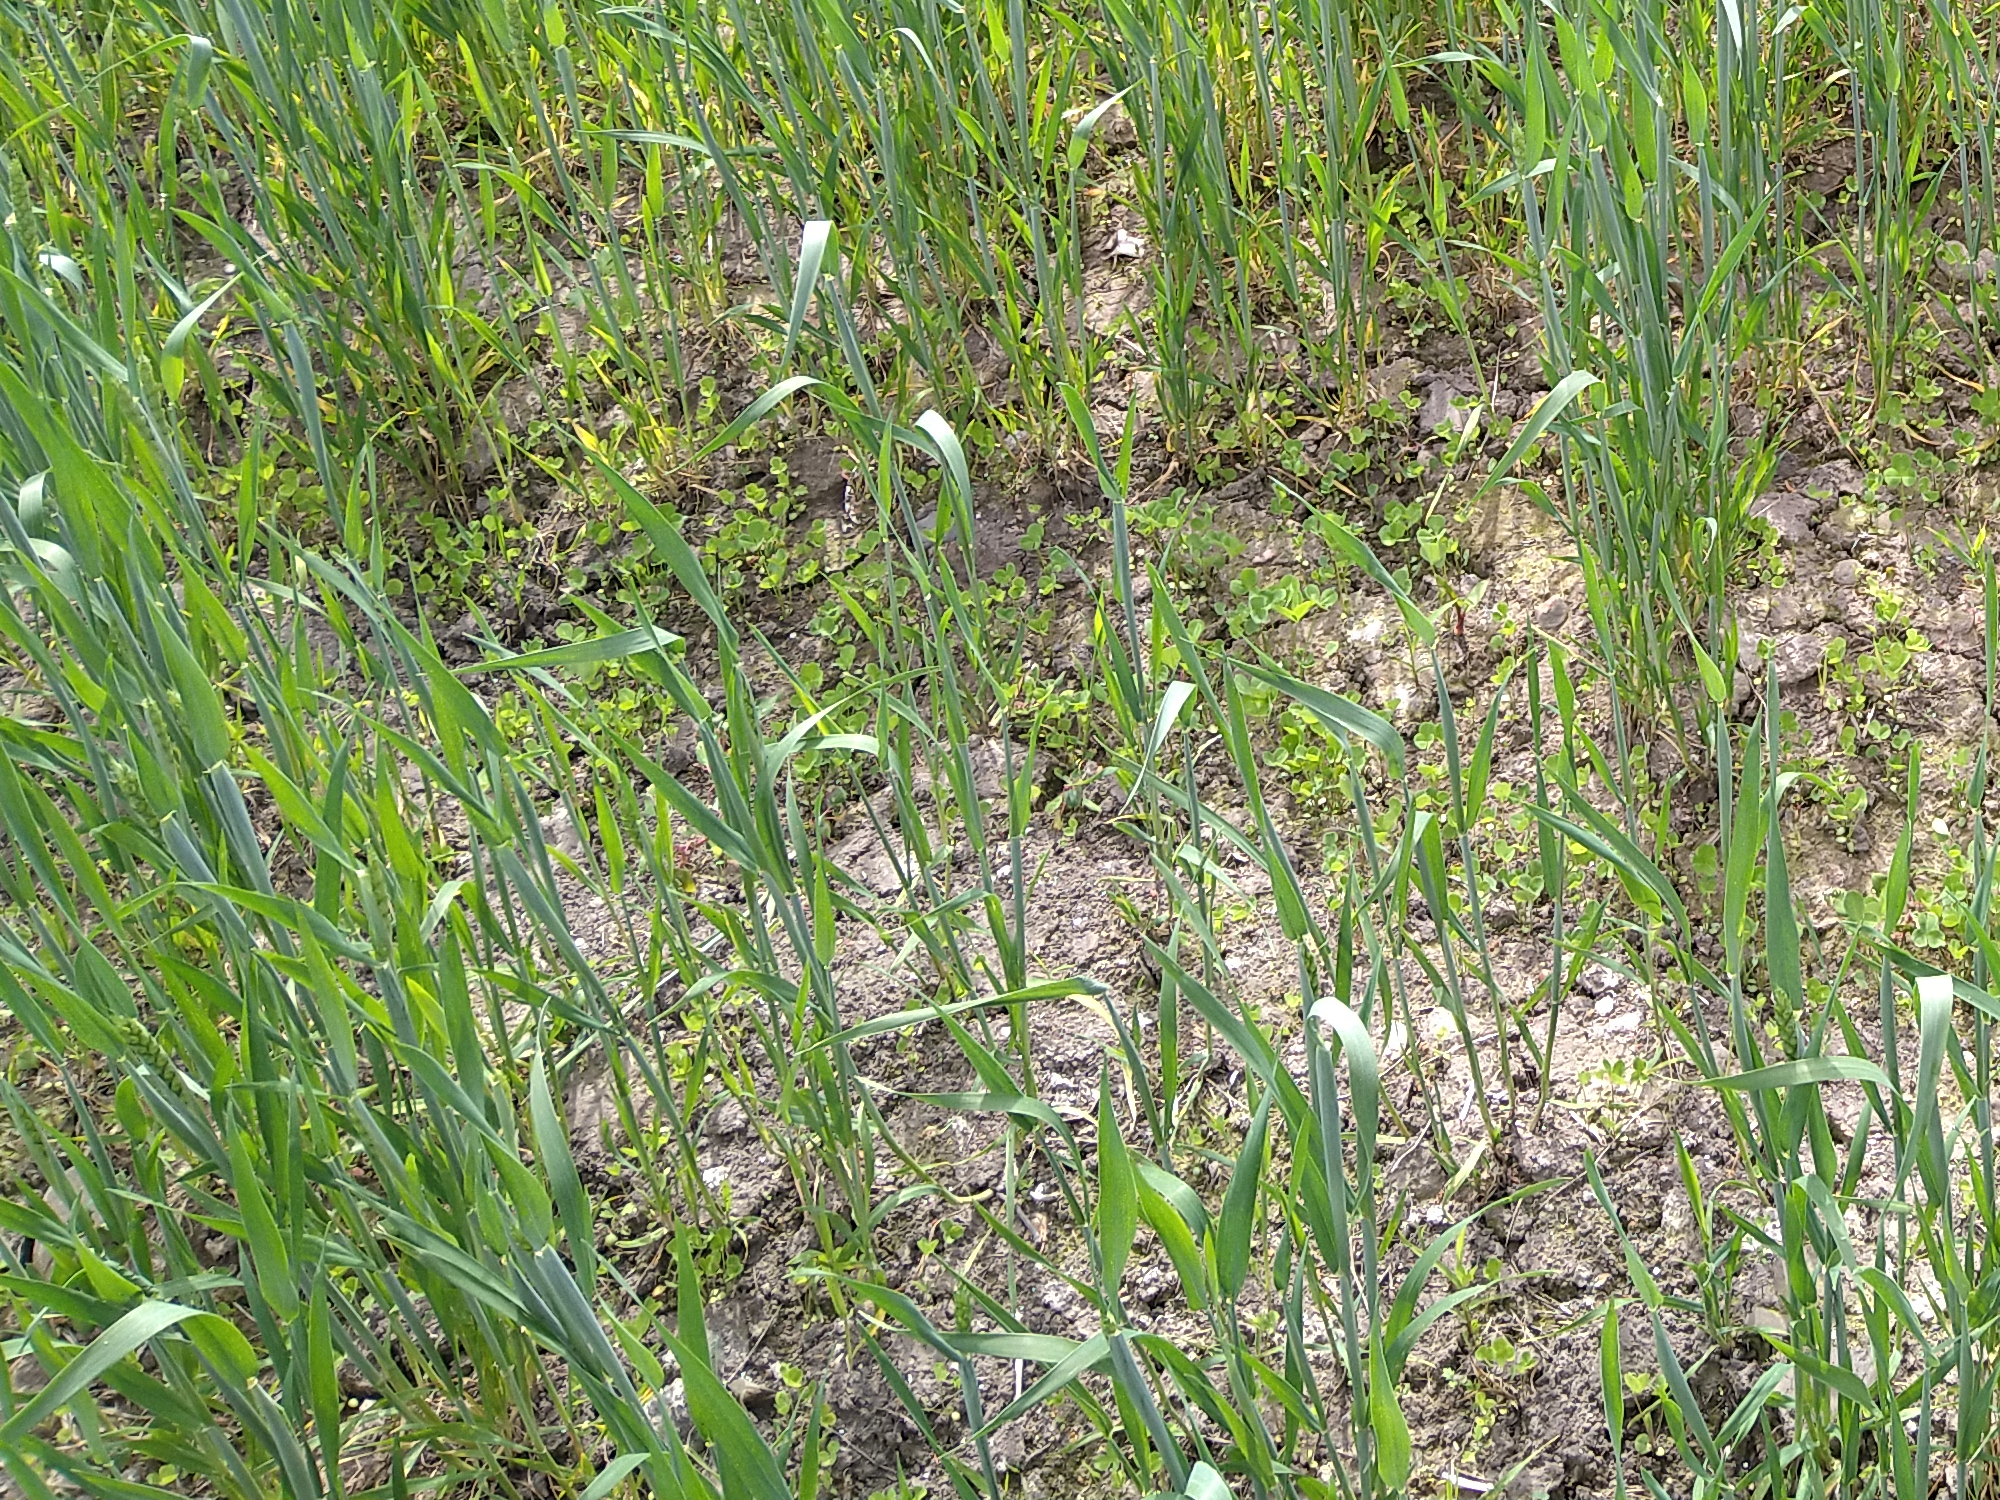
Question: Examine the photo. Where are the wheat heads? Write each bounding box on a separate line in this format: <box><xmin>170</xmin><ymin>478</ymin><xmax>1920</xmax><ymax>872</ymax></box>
<box><xmin>139</xmin><ymin>357</ymin><xmax>168</xmax><ymax>436</ymax></box>
<box><xmin>257</xmin><ymin>31</ymin><xmax>278</xmax><ymax>92</ymax></box>
<box><xmin>39</xmin><ymin>11</ymin><xmax>67</xmax><ymax>65</ymax></box>
<box><xmin>737</xmin><ymin>0</ymin><xmax>767</xmax><ymax>47</ymax></box>
<box><xmin>119</xmin><ymin>1013</ymin><xmax>186</xmax><ymax>1103</ymax></box>
<box><xmin>351</xmin><ymin>1105</ymin><xmax>376</xmax><ymax>1151</ymax></box>
<box><xmin>1769</xmin><ymin>984</ymin><xmax>1797</xmax><ymax>1059</ymax></box>
<box><xmin>963</xmin><ymin>0</ymin><xmax>980</xmax><ymax>25</ymax></box>
<box><xmin>1508</xmin><ymin>120</ymin><xmax>1527</xmax><ymax>172</ymax></box>
<box><xmin>504</xmin><ymin>0</ymin><xmax>531</xmax><ymax>82</ymax></box>
<box><xmin>8</xmin><ymin>1086</ymin><xmax>47</xmax><ymax>1157</ymax></box>
<box><xmin>368</xmin><ymin>845</ymin><xmax>388</xmax><ymax>918</ymax></box>
<box><xmin>43</xmin><ymin>265</ymin><xmax>68</xmax><ymax>314</ymax></box>
<box><xmin>6</xmin><ymin>157</ymin><xmax>37</xmax><ymax>260</ymax></box>
<box><xmin>704</xmin><ymin>0</ymin><xmax>721</xmax><ymax>21</ymax></box>
<box><xmin>114</xmin><ymin>387</ymin><xmax>155</xmax><ymax>443</ymax></box>
<box><xmin>144</xmin><ymin>698</ymin><xmax>180</xmax><ymax>785</ymax></box>
<box><xmin>176</xmin><ymin>106</ymin><xmax>213</xmax><ymax>173</ymax></box>
<box><xmin>113</xmin><ymin>763</ymin><xmax>160</xmax><ymax>841</ymax></box>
